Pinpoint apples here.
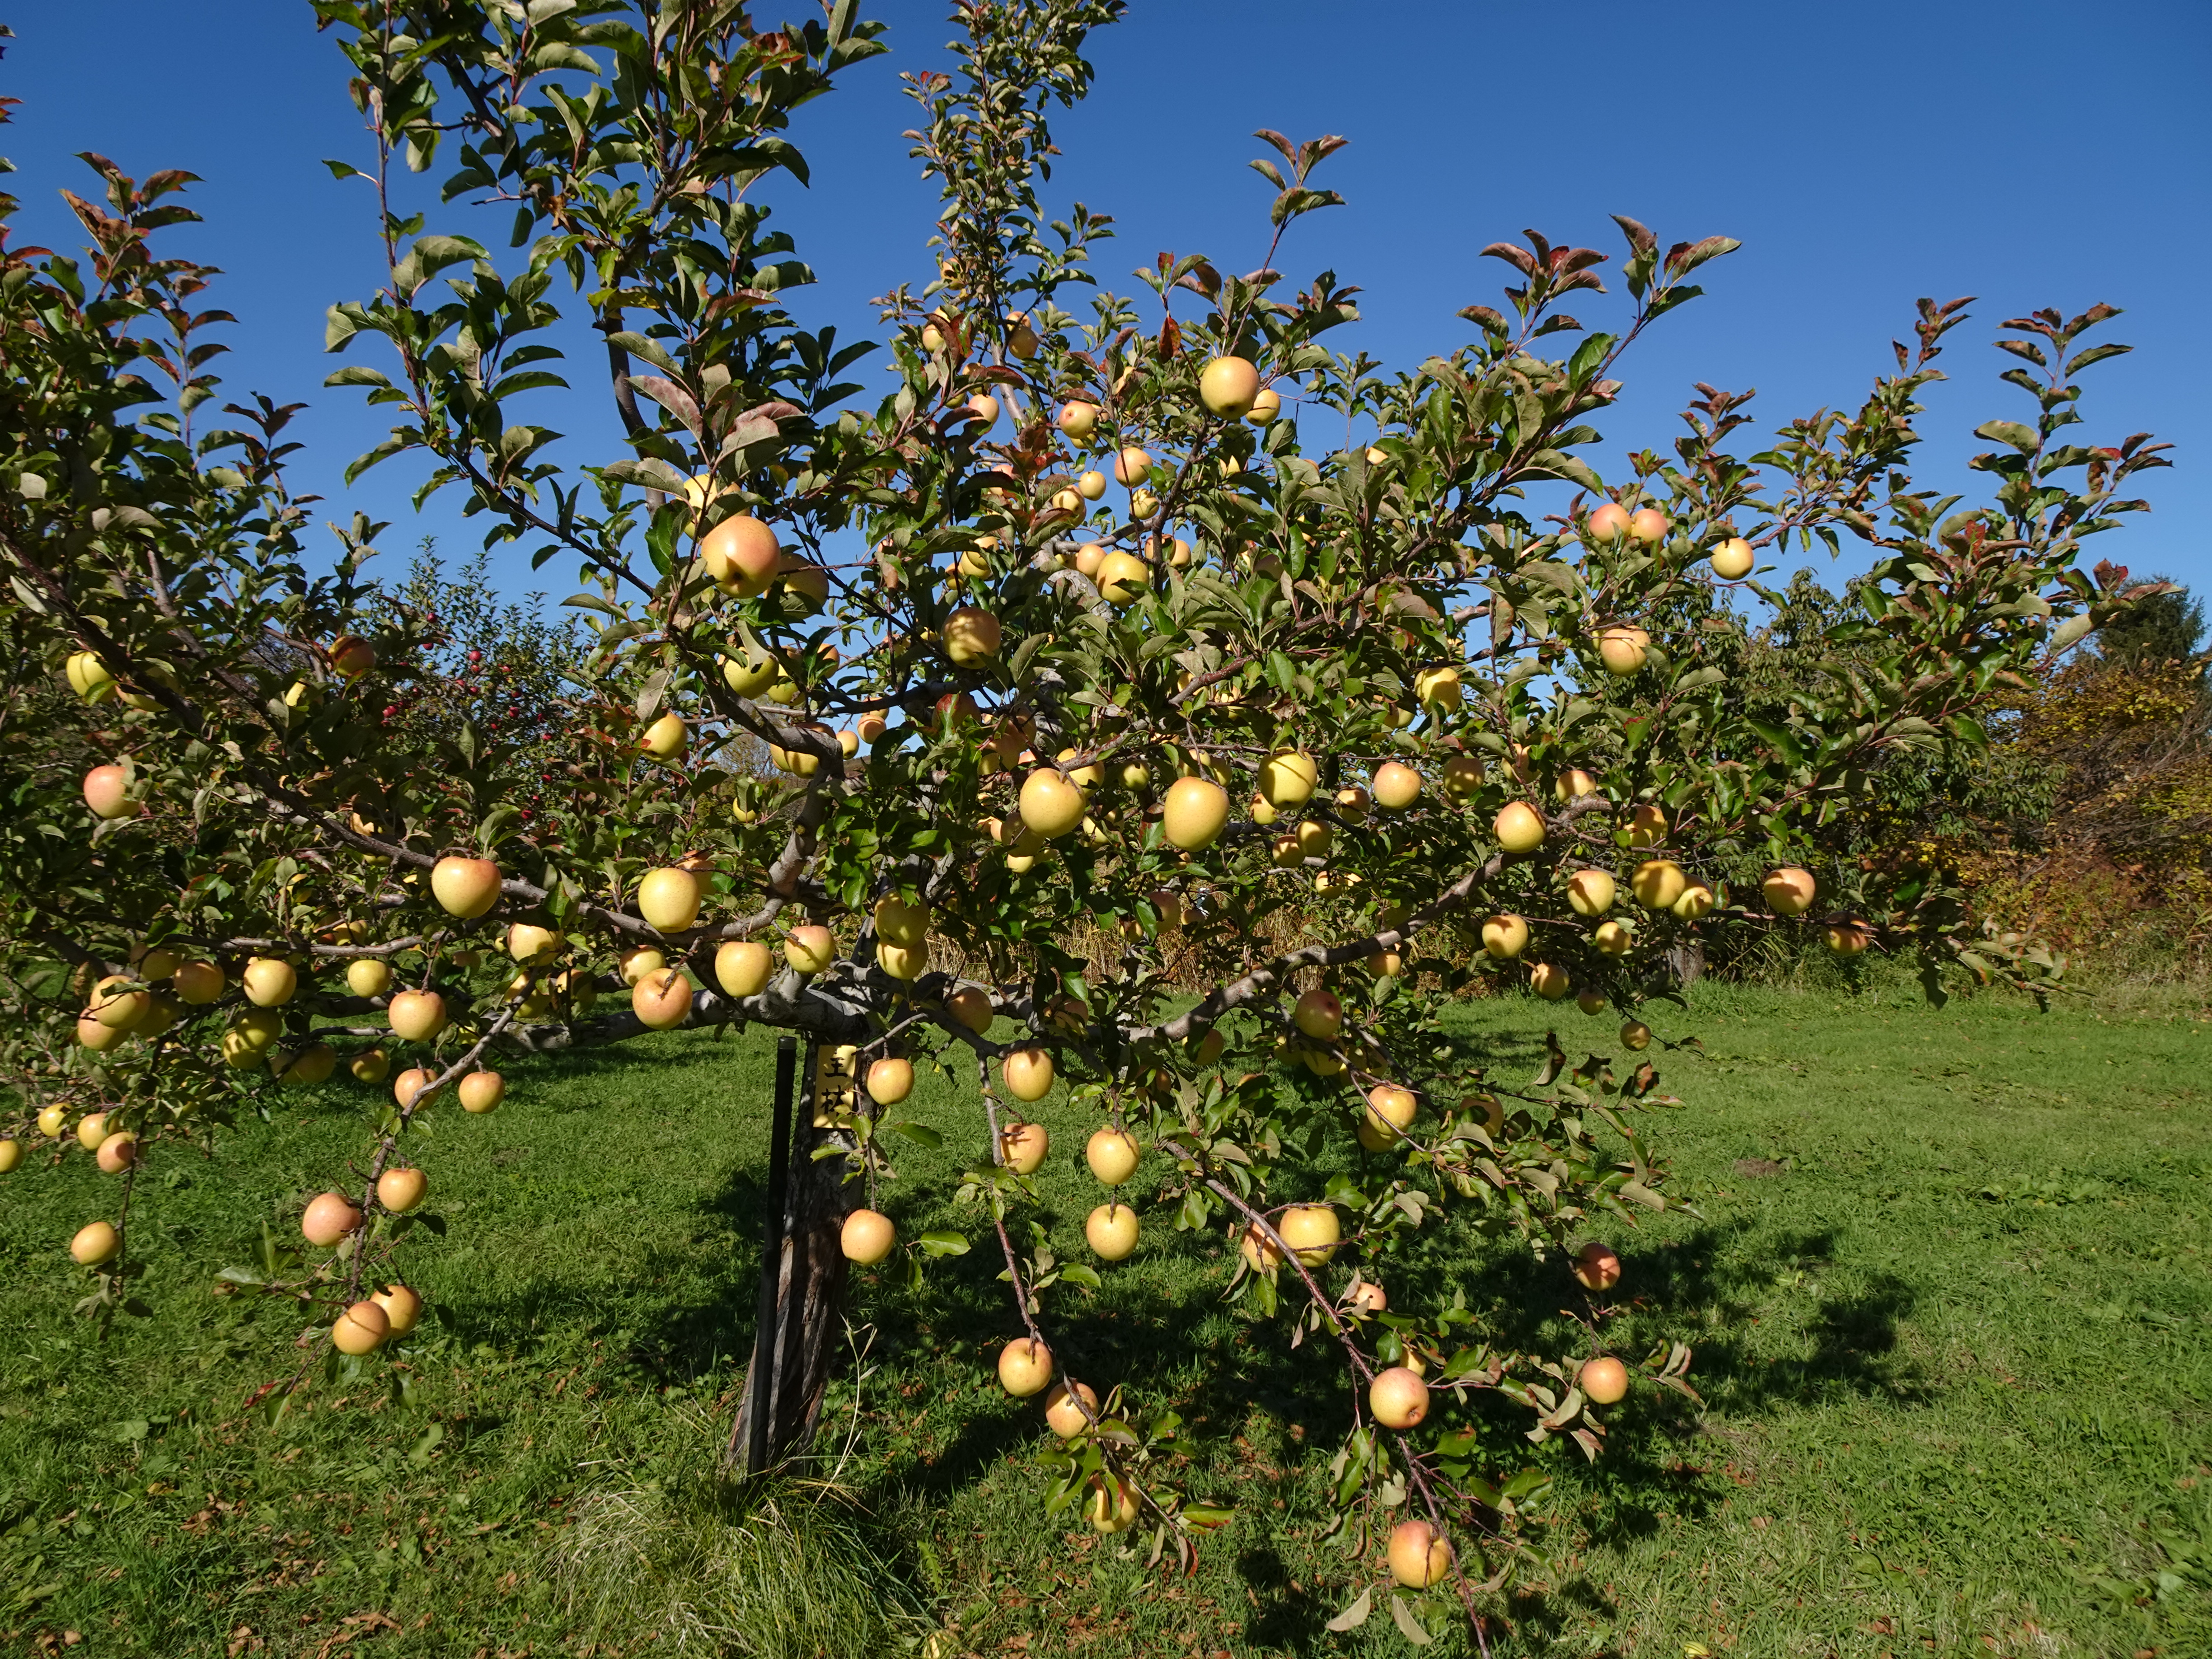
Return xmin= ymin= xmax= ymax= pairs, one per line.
xmin=857 ymin=715 xmax=886 ymax=744
xmin=1434 ymin=634 xmax=1465 ymax=662
xmin=1380 ymin=1127 xmax=1409 ymax=1141
xmin=1502 ymin=743 xmax=1541 ymax=784
xmin=1070 ymin=427 xmax=1098 ymax=449
xmin=1631 ymin=859 xmax=1685 ymax=909
xmin=235 ymin=1007 xmax=282 ymax=1050
xmin=96 ymin=1131 xmax=143 ymax=1174
xmin=1144 ymin=534 xmax=1176 ymax=561
xmin=1366 ymin=1084 xmax=1417 ymax=1136
xmin=1200 ymin=356 xmax=1260 ymax=420
xmin=1172 ymin=850 xmax=1191 ymax=871
xmin=1387 ymin=1520 xmax=1450 ymax=1589
xmin=1581 ymin=1357 xmax=1628 ymax=1404
xmin=1482 ymin=915 xmax=1528 ymax=958
xmin=1348 ymin=1282 xmax=1386 ymax=1320
xmin=332 ymin=1301 xmax=390 ymax=1356
xmin=1183 ymin=749 xmax=1210 ymax=777
xmin=1000 ymin=812 xmax=1045 ymax=857
xmin=1531 ymin=963 xmax=1569 ymax=1000
xmin=1007 ymin=854 xmax=1034 ymax=874
xmin=1144 ymin=891 xmax=1181 ymax=933
xmin=1567 ymin=870 xmax=1615 ymax=916
xmin=862 ymin=697 xmax=889 ymax=720
xmin=1181 ymin=907 xmax=1207 ymax=934
xmin=302 ymin=1192 xmax=361 ymax=1247
xmin=1055 ymin=748 xmax=1105 ymax=799
xmin=632 ymin=968 xmax=692 ymax=1030
xmin=77 ymin=1005 xmax=132 ymax=1052
xmin=1008 ymin=326 xmax=1039 ymax=359
xmin=989 ymin=464 xmax=1013 ymax=495
xmin=84 ymin=765 xmax=141 ymax=819
xmin=38 ymin=1103 xmax=73 ymax=1137
xmin=767 ymin=663 xmax=805 ymax=706
xmin=1451 ymin=1162 xmax=1492 ymax=1198
xmin=507 ymin=921 xmax=564 ymax=967
xmin=1295 ymin=820 xmax=1333 ymax=857
xmin=619 ymin=945 xmax=666 ymax=987
xmin=1398 ymin=1343 xmax=1426 ymax=1378
xmin=69 ymin=1221 xmax=122 ymax=1266
xmin=1045 ymin=1382 xmax=1098 ymax=1441
xmin=90 ymin=975 xmax=150 ymax=1029
xmin=1237 ymin=1074 xmax=1260 ymax=1110
xmin=1357 ymin=1115 xmax=1397 ymax=1153
xmin=1210 ymin=685 xmax=1242 ymax=721
xmin=642 ymin=712 xmax=688 ymax=763
xmin=1492 ymin=801 xmax=1546 ymax=854
xmin=236 ymin=954 xmax=265 ymax=965
xmin=1114 ymin=447 xmax=1153 ymax=488
xmin=115 ymin=657 xmax=180 ymax=712
xmin=675 ymin=473 xmax=750 ymax=545
xmin=1344 ymin=873 xmax=1363 ymax=890
xmin=174 ymin=960 xmax=225 ymax=1004
xmin=1005 ymin=706 xmax=1036 ymax=752
xmin=1150 ymin=732 xmax=1180 ymax=745
xmin=875 ymin=887 xmax=930 ymax=950
xmin=1254 ymin=554 xmax=1284 ymax=579
xmin=784 ymin=925 xmax=835 ymax=975
xmin=876 ymin=937 xmax=929 ymax=979
xmin=1000 ymin=1122 xmax=1049 ymax=1175
xmin=817 ymin=643 xmax=840 ymax=679
xmin=1710 ymin=538 xmax=1754 ymax=580
xmin=990 ymin=819 xmax=1003 ymax=843
xmin=717 ymin=645 xmax=779 ymax=700
xmin=1078 ymin=836 xmax=1102 ymax=852
xmin=1043 ymin=993 xmax=1088 ymax=1031
xmin=922 ymin=324 xmax=944 ymax=353
xmin=1444 ymin=787 xmax=1469 ymax=806
xmin=363 ymin=854 xmax=393 ymax=867
xmin=431 ymin=856 xmax=501 ymax=918
xmin=941 ymin=607 xmax=1001 ymax=669
xmin=841 ymin=1209 xmax=895 ymax=1266
xmin=772 ymin=757 xmax=788 ymax=772
xmin=132 ymin=995 xmax=180 ymax=1037
xmin=1052 ymin=484 xmax=1085 ymax=515
xmin=1366 ymin=948 xmax=1401 ymax=979
xmin=638 ymin=867 xmax=701 ymax=933
xmin=986 ymin=733 xmax=1020 ymax=773
xmin=398 ymin=874 xmax=429 ymax=901
xmin=968 ymin=394 xmax=999 ymax=425
xmin=333 ymin=922 xmax=363 ymax=946
xmin=1245 ymin=388 xmax=1280 ymax=428
xmin=1058 ymin=400 xmax=1096 ymax=438
xmin=1072 ymin=552 xmax=1079 ymax=572
xmin=458 ymin=1025 xmax=480 ymax=1048
xmin=1129 ymin=487 xmax=1159 ymax=520
xmin=1821 ymin=909 xmax=1873 ymax=957
xmin=130 ymin=941 xmax=181 ymax=981
xmin=1087 ymin=1468 xmax=1142 ymax=1533
xmin=66 ymin=650 xmax=113 ymax=696
xmin=943 ymin=391 xmax=966 ymax=409
xmin=77 ymin=1113 xmax=124 ymax=1150
xmin=279 ymin=873 xmax=312 ymax=902
xmin=932 ymin=692 xmax=981 ymax=731
xmin=351 ymin=1049 xmax=390 ymax=1083
xmin=835 ymin=731 xmax=859 ymax=760
xmin=966 ymin=536 xmax=1000 ymax=570
xmin=1005 ymin=311 xmax=1031 ymax=331
xmin=939 ymin=258 xmax=966 ymax=290
xmin=1600 ymin=625 xmax=1651 ymax=677
xmin=1315 ymin=870 xmax=1342 ymax=900
xmin=1459 ymin=1093 xmax=1504 ymax=1138
xmin=378 ymin=1168 xmax=428 ymax=1212
xmin=1118 ymin=760 xmax=1150 ymax=792
xmin=1086 ymin=1129 xmax=1140 ymax=1185
xmin=733 ymin=797 xmax=761 ymax=822
xmin=1219 ymin=455 xmax=1248 ymax=480
xmin=285 ymin=677 xmax=324 ymax=709
xmin=453 ymin=950 xmax=481 ymax=978
xmin=271 ymin=1049 xmax=304 ymax=1084
xmin=1096 ymin=550 xmax=1149 ymax=608
xmin=395 ymin=1069 xmax=441 ymax=1112
xmin=1086 ymin=1204 xmax=1140 ymax=1261
xmin=999 ymin=1338 xmax=1053 ymax=1397
xmin=945 ymin=562 xmax=965 ymax=590
xmin=1369 ymin=1367 xmax=1429 ymax=1428
xmin=347 ymin=959 xmax=391 ymax=999
xmin=1578 ymin=985 xmax=1605 ymax=1016
xmin=495 ymin=936 xmax=509 ymax=952
xmin=1279 ymin=1202 xmax=1340 ymax=1267
xmin=1002 ymin=1048 xmax=1054 ymax=1102
xmin=1244 ymin=1221 xmax=1285 ymax=1273
xmin=223 ymin=1029 xmax=266 ymax=1070
xmin=505 ymin=970 xmax=553 ymax=1018
xmin=1054 ymin=553 xmax=1074 ymax=568
xmin=317 ymin=906 xmax=342 ymax=927
xmin=354 ymin=920 xmax=368 ymax=944
xmin=1076 ymin=544 xmax=1107 ymax=580
xmin=1238 ymin=965 xmax=1279 ymax=1008
xmin=1164 ymin=776 xmax=1230 ymax=851
xmin=458 ymin=1072 xmax=505 ymax=1113
xmin=350 ymin=813 xmax=382 ymax=837
xmin=1249 ymin=793 xmax=1280 ymax=825
xmin=1595 ymin=922 xmax=1632 ymax=958
xmin=1177 ymin=671 xmax=1203 ymax=695
xmin=1296 ymin=515 xmax=1316 ymax=547
xmin=975 ymin=794 xmax=994 ymax=812
xmin=1395 ymin=706 xmax=1415 ymax=728
xmin=1069 ymin=504 xmax=1086 ymax=527
xmin=780 ymin=644 xmax=808 ymax=662
xmin=960 ymin=551 xmax=991 ymax=580
xmin=784 ymin=722 xmax=836 ymax=779
xmin=1170 ymin=539 xmax=1191 ymax=569
xmin=1576 ymin=1242 xmax=1621 ymax=1291
xmin=1520 ymin=542 xmax=1542 ymax=564
xmin=945 ymin=987 xmax=993 ymax=1036
xmin=1339 ymin=1062 xmax=1353 ymax=1085
xmin=555 ymin=969 xmax=599 ymax=1014
xmin=1414 ymin=667 xmax=1462 ymax=716
xmin=1669 ymin=873 xmax=1714 ymax=921
xmin=891 ymin=993 xmax=903 ymax=1006
xmin=1233 ymin=550 xmax=1251 ymax=571
xmin=1346 ymin=1044 xmax=1387 ymax=1083
xmin=1373 ymin=762 xmax=1421 ymax=810
xmin=877 ymin=539 xmax=895 ymax=552
xmin=1034 ymin=849 xmax=1058 ymax=866
xmin=1620 ymin=1021 xmax=1651 ymax=1051
xmin=976 ymin=816 xmax=995 ymax=840
xmin=1209 ymin=753 xmax=1232 ymax=787
xmin=934 ymin=305 xmax=960 ymax=323
xmin=867 ymin=1058 xmax=914 ymax=1105
xmin=1588 ymin=503 xmax=1632 ymax=546
xmin=920 ymin=627 xmax=941 ymax=642
xmin=328 ymin=635 xmax=375 ymax=678
xmin=1083 ymin=805 xmax=1124 ymax=844
xmin=1443 ymin=755 xmax=1486 ymax=799
xmin=1555 ymin=770 xmax=1596 ymax=806
xmin=1078 ymin=471 xmax=1106 ymax=501
xmin=369 ymin=1285 xmax=421 ymax=1339
xmin=1122 ymin=410 xmax=1137 ymax=425
xmin=962 ymin=362 xmax=984 ymax=376
xmin=1182 ymin=1028 xmax=1224 ymax=1065
xmin=1135 ymin=1066 xmax=1171 ymax=1101
xmin=770 ymin=743 xmax=792 ymax=771
xmin=715 ymin=941 xmax=773 ymax=997
xmin=1336 ymin=786 xmax=1371 ymax=824
xmin=1365 ymin=695 xmax=1399 ymax=742
xmin=388 ymin=989 xmax=446 ymax=1042
xmin=700 ymin=515 xmax=781 ymax=599
xmin=1764 ymin=867 xmax=1815 ymax=915
xmin=966 ymin=382 xmax=991 ymax=395
xmin=243 ymin=959 xmax=296 ymax=1007
xmin=1097 ymin=412 xmax=1110 ymax=424
xmin=1019 ymin=768 xmax=1086 ymax=838
xmin=294 ymin=1043 xmax=335 ymax=1084
xmin=1303 ymin=1033 xmax=1346 ymax=1076
xmin=1258 ymin=746 xmax=1317 ymax=810
xmin=0 ymin=1139 xmax=25 ymax=1175
xmin=763 ymin=553 xmax=829 ymax=619
xmin=1588 ymin=615 xmax=1608 ymax=651
xmin=1365 ymin=447 xmax=1388 ymax=465
xmin=1294 ymin=990 xmax=1342 ymax=1039
xmin=1629 ymin=509 xmax=1668 ymax=544
xmin=1119 ymin=919 xmax=1144 ymax=942
xmin=1617 ymin=805 xmax=1668 ymax=847
xmin=675 ymin=849 xmax=717 ymax=895
xmin=1273 ymin=1032 xmax=1305 ymax=1066
xmin=977 ymin=746 xmax=999 ymax=775
xmin=1154 ymin=873 xmax=1171 ymax=887
xmin=1018 ymin=751 xmax=1036 ymax=765
xmin=1272 ymin=835 xmax=1306 ymax=868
